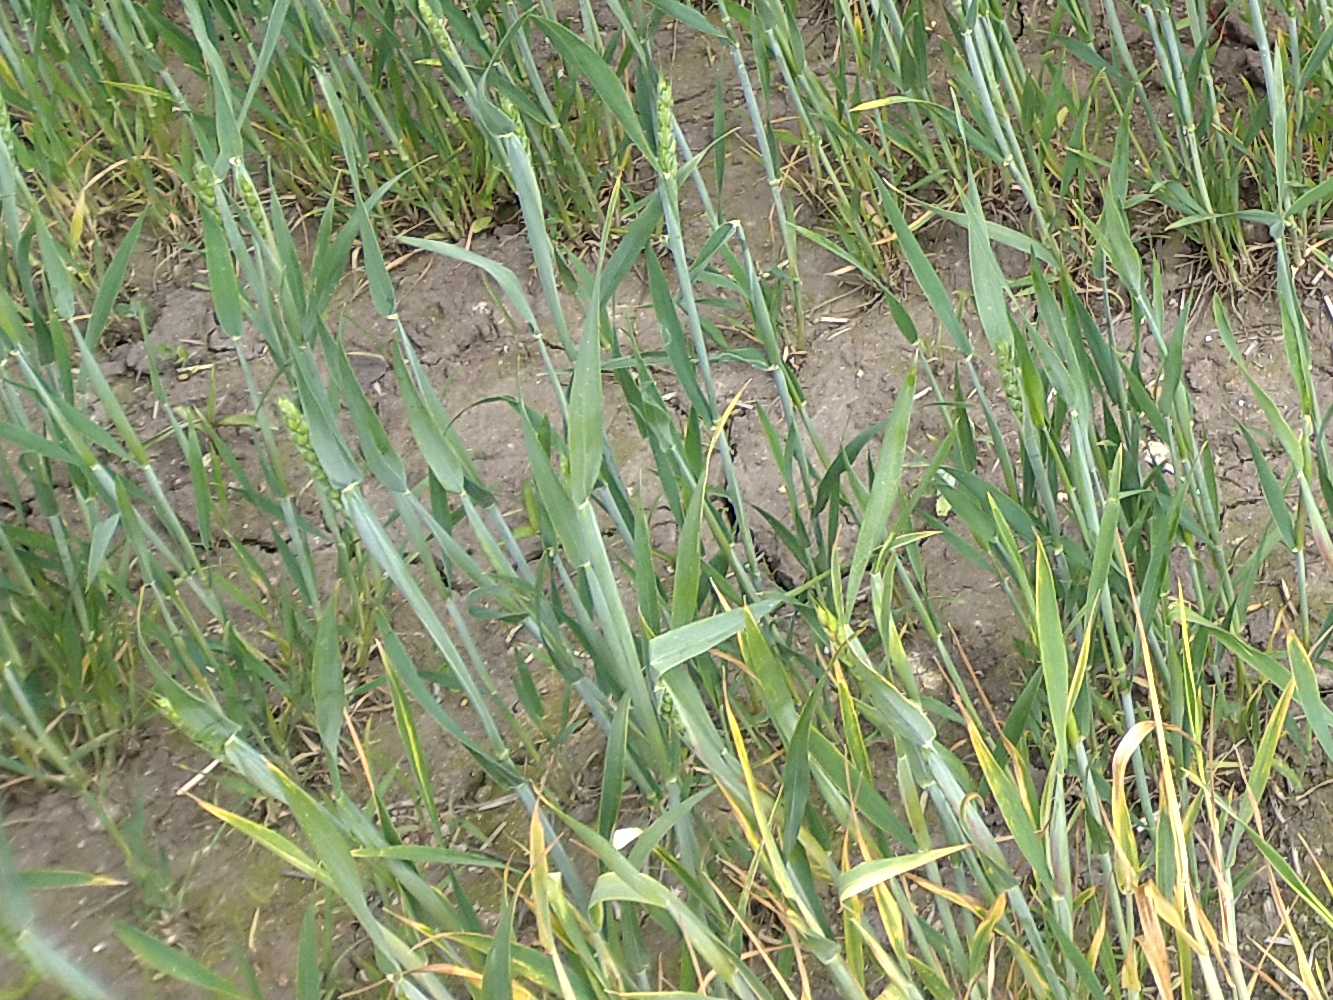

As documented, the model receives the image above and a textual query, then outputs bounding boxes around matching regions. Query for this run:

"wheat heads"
[660,685,675,722]
[195,161,223,227]
[997,345,1021,417]
[278,400,355,545]
[817,606,845,649]
[157,697,213,751]
[238,173,267,236]
[653,78,678,174]
[499,88,529,151]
